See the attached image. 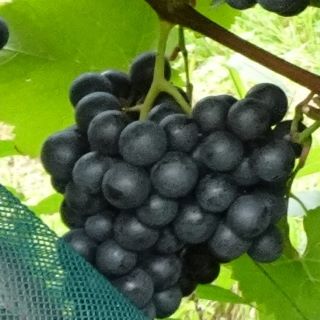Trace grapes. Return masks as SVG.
<instances>
[{
	"instance_id": "obj_1",
	"label": "grapes",
	"mask_w": 320,
	"mask_h": 320,
	"mask_svg": "<svg viewBox=\"0 0 320 320\" xmlns=\"http://www.w3.org/2000/svg\"><path fill=\"white\" fill-rule=\"evenodd\" d=\"M154 52L128 74L84 73L70 84L77 125L52 134L41 150L50 184L63 194L59 237L111 282L148 320L174 313L182 296L217 278L241 254L270 264L284 249L274 226L304 144L284 140L292 120L273 83L244 99L207 96L186 119L160 92L144 103Z\"/></svg>"
},
{
	"instance_id": "obj_5",
	"label": "grapes",
	"mask_w": 320,
	"mask_h": 320,
	"mask_svg": "<svg viewBox=\"0 0 320 320\" xmlns=\"http://www.w3.org/2000/svg\"><path fill=\"white\" fill-rule=\"evenodd\" d=\"M172 87L176 88V89L183 95V97L185 98V100H186L187 103H188L187 95L185 94V92L183 91V89H182V88H179V87H175V86H172Z\"/></svg>"
},
{
	"instance_id": "obj_3",
	"label": "grapes",
	"mask_w": 320,
	"mask_h": 320,
	"mask_svg": "<svg viewBox=\"0 0 320 320\" xmlns=\"http://www.w3.org/2000/svg\"><path fill=\"white\" fill-rule=\"evenodd\" d=\"M9 42V28L7 24L0 20V50L3 49Z\"/></svg>"
},
{
	"instance_id": "obj_6",
	"label": "grapes",
	"mask_w": 320,
	"mask_h": 320,
	"mask_svg": "<svg viewBox=\"0 0 320 320\" xmlns=\"http://www.w3.org/2000/svg\"><path fill=\"white\" fill-rule=\"evenodd\" d=\"M306 128H307V127L300 122V123H299L298 130H297V133H302L303 130L306 129Z\"/></svg>"
},
{
	"instance_id": "obj_2",
	"label": "grapes",
	"mask_w": 320,
	"mask_h": 320,
	"mask_svg": "<svg viewBox=\"0 0 320 320\" xmlns=\"http://www.w3.org/2000/svg\"><path fill=\"white\" fill-rule=\"evenodd\" d=\"M227 4L237 9L251 8L256 2L264 8L277 12L282 16H293L301 13L308 5L320 7V0H225Z\"/></svg>"
},
{
	"instance_id": "obj_4",
	"label": "grapes",
	"mask_w": 320,
	"mask_h": 320,
	"mask_svg": "<svg viewBox=\"0 0 320 320\" xmlns=\"http://www.w3.org/2000/svg\"><path fill=\"white\" fill-rule=\"evenodd\" d=\"M170 72H171V68H170V64H169V60L164 56V71H163V76L164 78L168 81L170 78Z\"/></svg>"
}]
</instances>
